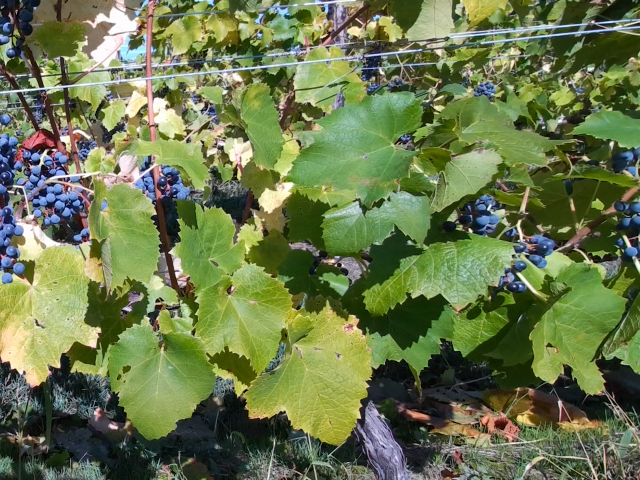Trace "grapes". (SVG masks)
Here are the masks:
<instances>
[{
    "label": "grapes",
    "instance_id": "01657485",
    "mask_svg": "<svg viewBox=\"0 0 640 480\" xmlns=\"http://www.w3.org/2000/svg\"><path fill=\"white\" fill-rule=\"evenodd\" d=\"M19 139L15 136H10L8 133L0 134V247L4 248V253L8 257L0 258V270L12 267L14 274H23L25 272V265L21 262H14L10 257L19 258L21 251L11 245L10 236H21L24 233V227L17 225L15 219L14 209L9 207L10 195L7 193V186L14 184V170H21L23 168V162L21 160H15V154L17 153V145Z\"/></svg>",
    "mask_w": 640,
    "mask_h": 480
},
{
    "label": "grapes",
    "instance_id": "b958b902",
    "mask_svg": "<svg viewBox=\"0 0 640 480\" xmlns=\"http://www.w3.org/2000/svg\"><path fill=\"white\" fill-rule=\"evenodd\" d=\"M24 174L27 178H18L16 185L18 187H24L27 192L28 200H32L34 210L32 214L36 218L42 216V208H45L49 203L54 202V207L62 211V216L67 219H71L75 214L84 209L85 199L80 197L78 193H83V189H77L75 191L63 192V185L58 184H45L42 189L34 196L36 190H38L43 183L47 180V176L41 173L39 166L26 167Z\"/></svg>",
    "mask_w": 640,
    "mask_h": 480
},
{
    "label": "grapes",
    "instance_id": "0513c4c2",
    "mask_svg": "<svg viewBox=\"0 0 640 480\" xmlns=\"http://www.w3.org/2000/svg\"><path fill=\"white\" fill-rule=\"evenodd\" d=\"M488 207L491 210L499 209V203L489 195L476 198L472 203L466 202L463 211L467 213L459 218V223L470 225L473 222L472 230L481 236L494 233L495 225L499 223V217L496 214H489Z\"/></svg>",
    "mask_w": 640,
    "mask_h": 480
},
{
    "label": "grapes",
    "instance_id": "84f90ec7",
    "mask_svg": "<svg viewBox=\"0 0 640 480\" xmlns=\"http://www.w3.org/2000/svg\"><path fill=\"white\" fill-rule=\"evenodd\" d=\"M160 171L165 177H160L158 180L159 186L169 185L168 191H163L162 205L177 207L178 203L173 201L175 199L185 200L192 193V188L184 185L181 181L180 170L174 167H169L166 164L160 166Z\"/></svg>",
    "mask_w": 640,
    "mask_h": 480
},
{
    "label": "grapes",
    "instance_id": "f8a65327",
    "mask_svg": "<svg viewBox=\"0 0 640 480\" xmlns=\"http://www.w3.org/2000/svg\"><path fill=\"white\" fill-rule=\"evenodd\" d=\"M529 242L536 244L535 250L527 248L526 244H519L514 246L513 250L516 252H524L529 254L528 261L535 265L537 269H543L547 265V260L544 256H552L556 242L549 237H545L542 234H533L529 237Z\"/></svg>",
    "mask_w": 640,
    "mask_h": 480
},
{
    "label": "grapes",
    "instance_id": "5460f4e3",
    "mask_svg": "<svg viewBox=\"0 0 640 480\" xmlns=\"http://www.w3.org/2000/svg\"><path fill=\"white\" fill-rule=\"evenodd\" d=\"M613 163L612 169L615 173H620L621 171H627L630 175H636V167L628 166V163L633 162L634 160H638L640 158V150L633 149L632 151H624L622 153H613Z\"/></svg>",
    "mask_w": 640,
    "mask_h": 480
},
{
    "label": "grapes",
    "instance_id": "83cd7487",
    "mask_svg": "<svg viewBox=\"0 0 640 480\" xmlns=\"http://www.w3.org/2000/svg\"><path fill=\"white\" fill-rule=\"evenodd\" d=\"M41 0H24L23 6L19 10V20L23 36H31L33 26L29 23L33 19V7L38 8Z\"/></svg>",
    "mask_w": 640,
    "mask_h": 480
},
{
    "label": "grapes",
    "instance_id": "e5b3c951",
    "mask_svg": "<svg viewBox=\"0 0 640 480\" xmlns=\"http://www.w3.org/2000/svg\"><path fill=\"white\" fill-rule=\"evenodd\" d=\"M54 159L57 162H53V158L51 156H46L44 158V164L49 166L47 169V173L52 176H65L67 171L62 167L60 163H66L68 161V156L63 154L62 152H56L54 154Z\"/></svg>",
    "mask_w": 640,
    "mask_h": 480
},
{
    "label": "grapes",
    "instance_id": "2adb6a1f",
    "mask_svg": "<svg viewBox=\"0 0 640 480\" xmlns=\"http://www.w3.org/2000/svg\"><path fill=\"white\" fill-rule=\"evenodd\" d=\"M506 276H501L498 281V286L502 287L504 283H508V290L513 293H525L527 286L522 281H515V275L511 269H504Z\"/></svg>",
    "mask_w": 640,
    "mask_h": 480
},
{
    "label": "grapes",
    "instance_id": "ef6de9ee",
    "mask_svg": "<svg viewBox=\"0 0 640 480\" xmlns=\"http://www.w3.org/2000/svg\"><path fill=\"white\" fill-rule=\"evenodd\" d=\"M135 188L141 189V192L143 194H146V196L151 199L152 203L155 204V191L153 186L152 171H149L141 179H139L135 184Z\"/></svg>",
    "mask_w": 640,
    "mask_h": 480
},
{
    "label": "grapes",
    "instance_id": "1ff8f66d",
    "mask_svg": "<svg viewBox=\"0 0 640 480\" xmlns=\"http://www.w3.org/2000/svg\"><path fill=\"white\" fill-rule=\"evenodd\" d=\"M614 209L619 212L628 211L632 214H640V203L635 202L627 204L623 203L622 201H617L614 203Z\"/></svg>",
    "mask_w": 640,
    "mask_h": 480
},
{
    "label": "grapes",
    "instance_id": "54f908b8",
    "mask_svg": "<svg viewBox=\"0 0 640 480\" xmlns=\"http://www.w3.org/2000/svg\"><path fill=\"white\" fill-rule=\"evenodd\" d=\"M23 45V40L21 38H17L15 41L14 48H7L5 50V55L9 58L21 57L22 60H26L27 56L22 50L19 48Z\"/></svg>",
    "mask_w": 640,
    "mask_h": 480
},
{
    "label": "grapes",
    "instance_id": "91a60905",
    "mask_svg": "<svg viewBox=\"0 0 640 480\" xmlns=\"http://www.w3.org/2000/svg\"><path fill=\"white\" fill-rule=\"evenodd\" d=\"M147 166H151V155L144 157V161L141 163L140 173L145 172Z\"/></svg>",
    "mask_w": 640,
    "mask_h": 480
}]
</instances>
